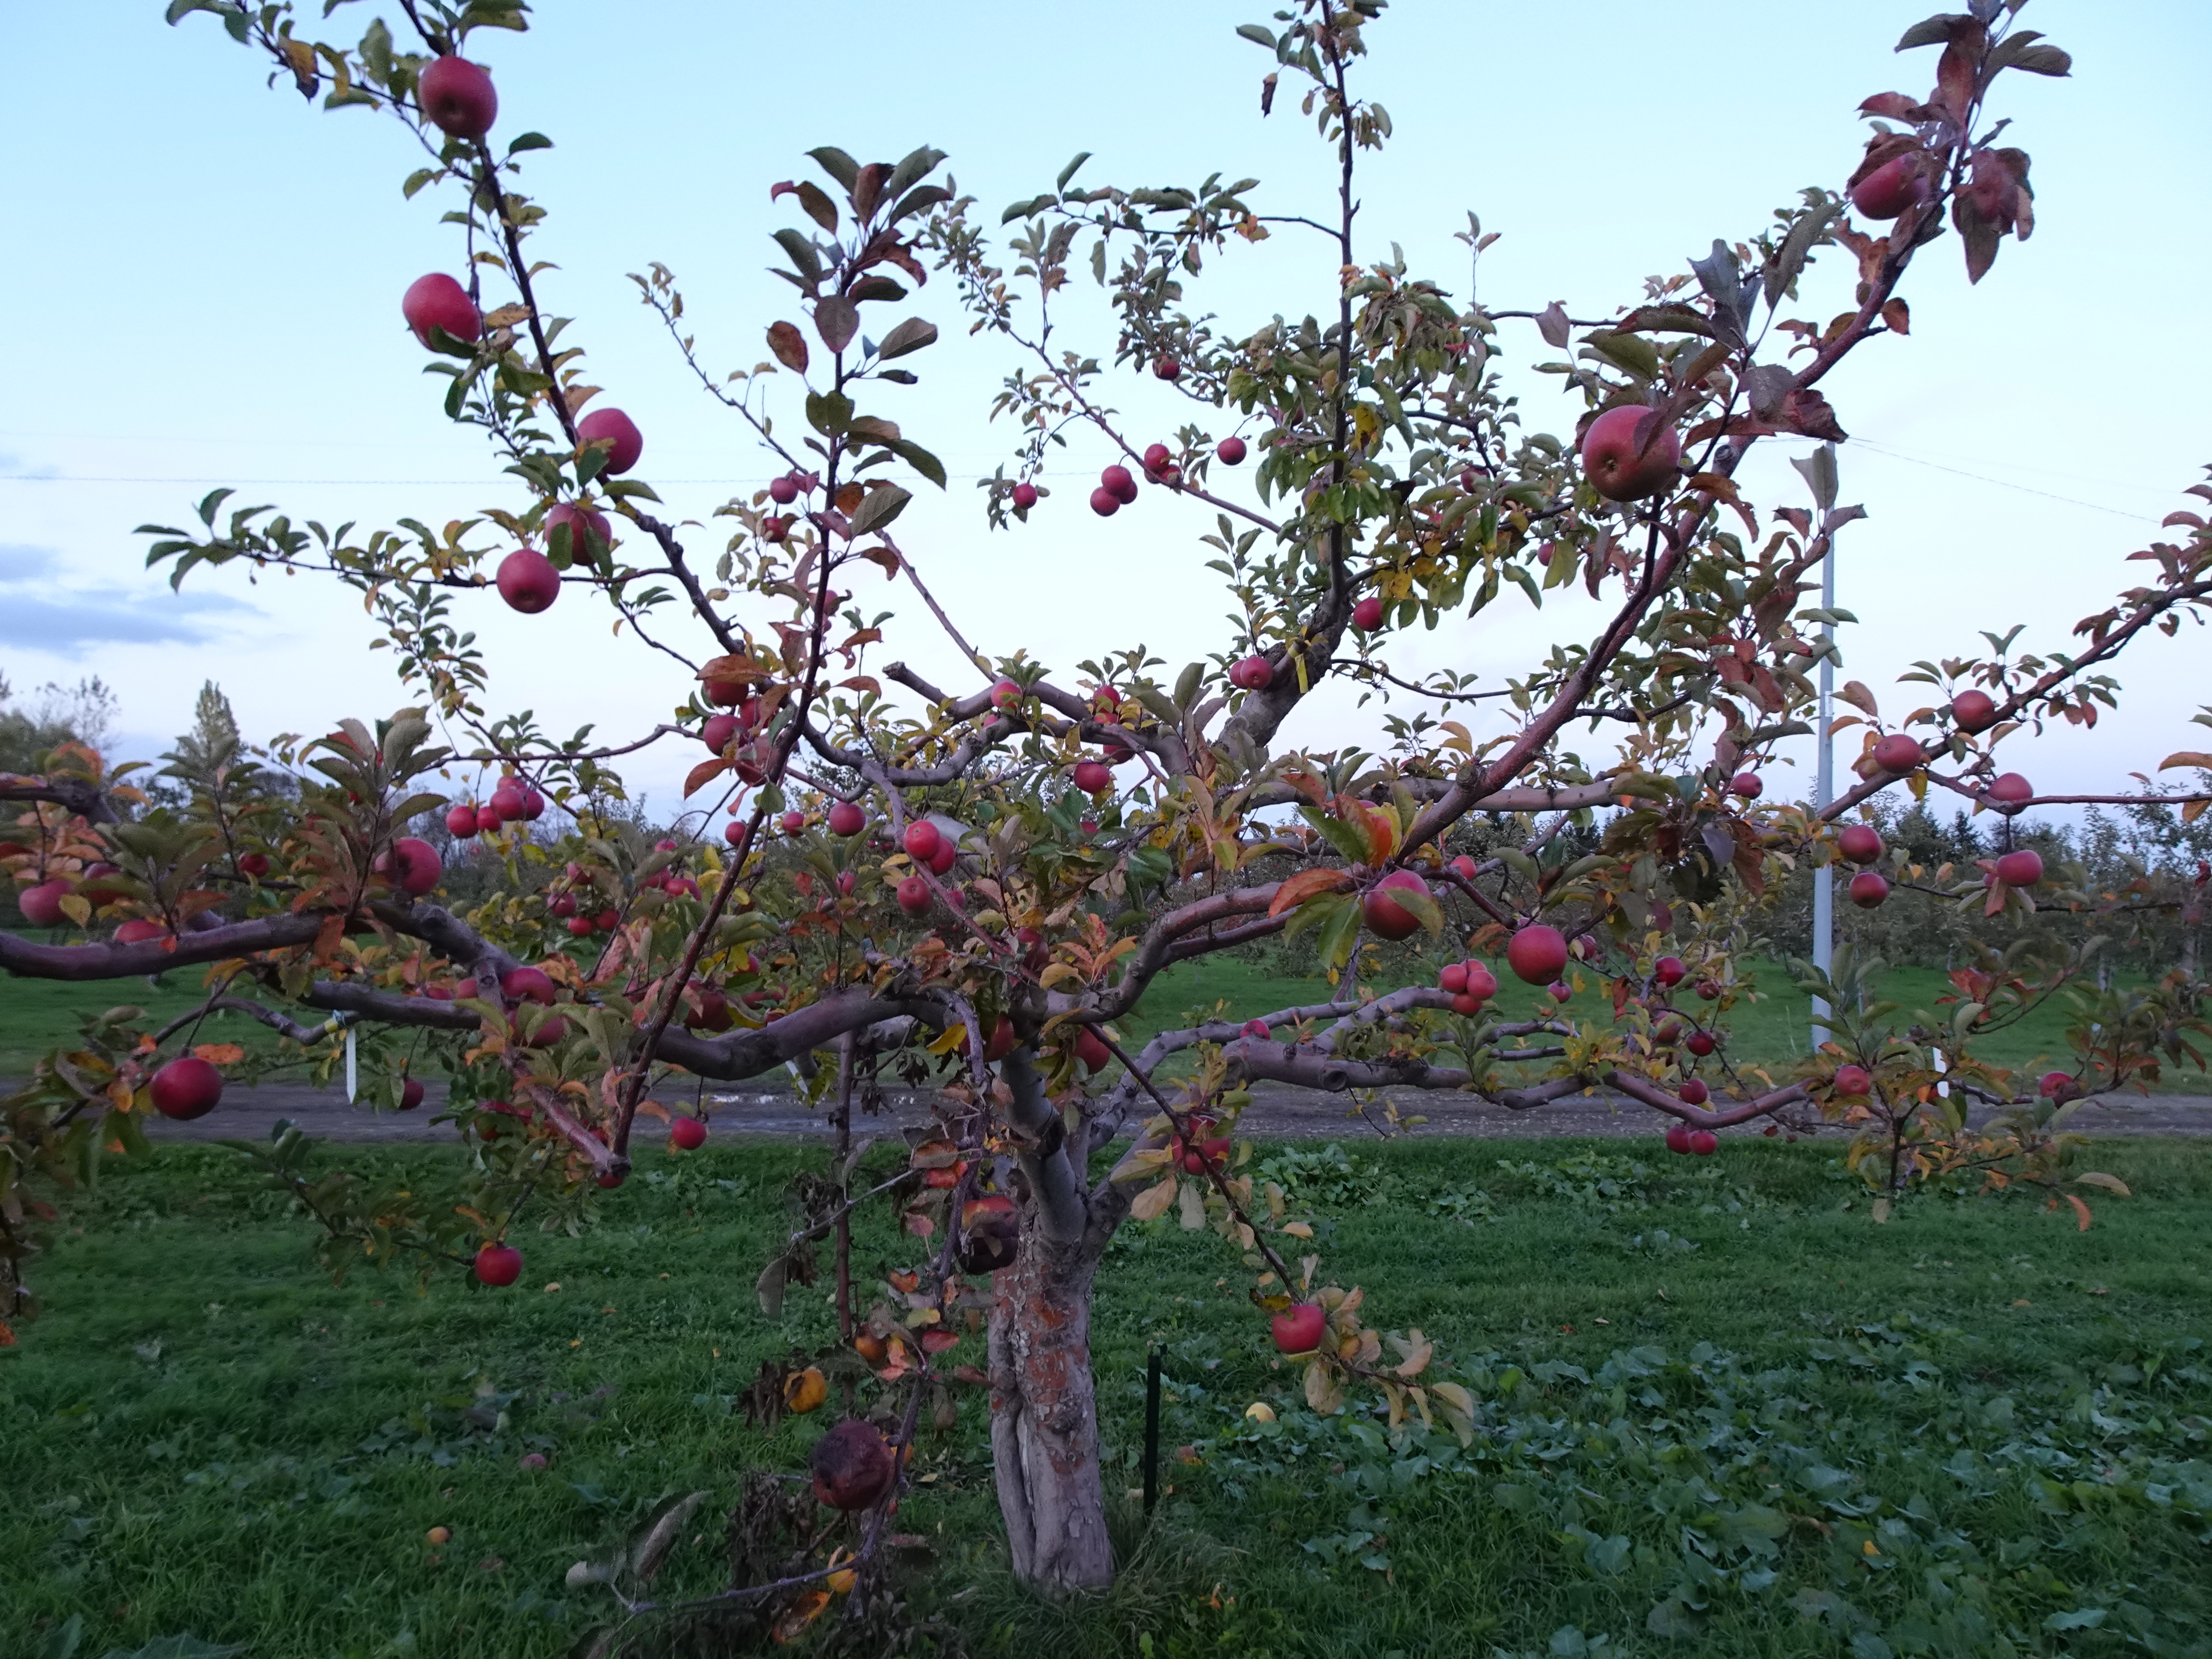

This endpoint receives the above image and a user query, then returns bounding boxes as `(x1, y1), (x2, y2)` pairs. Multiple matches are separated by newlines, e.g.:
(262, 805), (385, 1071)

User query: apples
(1240, 1018), (1274, 1047)
(817, 616), (832, 632)
(1218, 436), (1248, 466)
(906, 932), (948, 972)
(1679, 1078), (1711, 1105)
(373, 836), (444, 900)
(1876, 734), (1922, 778)
(515, 1105), (553, 1144)
(734, 742), (784, 787)
(1651, 1009), (1689, 1047)
(898, 875), (934, 911)
(1996, 848), (2045, 889)
(1117, 478), (1141, 508)
(1607, 863), (1640, 891)
(1695, 974), (1723, 1000)
(1590, 1041), (1617, 1065)
(235, 846), (273, 881)
(727, 950), (765, 988)
(669, 1116), (709, 1152)
(629, 1002), (667, 1037)
(1838, 822), (1883, 867)
(499, 771), (528, 799)
(445, 804), (483, 838)
(401, 272), (483, 355)
(18, 876), (84, 927)
(1752, 578), (1800, 617)
(80, 862), (138, 913)
(828, 1551), (862, 1591)
(956, 1007), (1017, 1065)
(642, 973), (694, 1027)
(2039, 1071), (2077, 1104)
(859, 833), (876, 849)
(1103, 735), (1135, 765)
(883, 1435), (915, 1468)
(1450, 991), (1483, 1017)
(1348, 813), (1398, 869)
(990, 681), (1025, 711)
(110, 917), (176, 968)
(539, 954), (582, 993)
(508, 1011), (565, 1051)
(418, 55), (499, 139)
(1457, 957), (1490, 983)
(1426, 504), (1466, 537)
(1360, 867), (1433, 943)
(567, 857), (599, 885)
(924, 835), (957, 877)
(1145, 466), (1165, 485)
(1072, 819), (1108, 852)
(781, 811), (812, 839)
(1145, 442), (1171, 473)
(1492, 527), (1511, 550)
(855, 1320), (882, 1357)
(594, 908), (624, 933)
(1537, 542), (1568, 570)
(1612, 998), (1647, 1030)
(1986, 773), (2035, 817)
(672, 974), (718, 1030)
(944, 886), (969, 920)
(1101, 465), (1133, 496)
(300, 957), (347, 994)
(1270, 437), (1304, 463)
(1686, 1131), (1719, 1156)
(665, 877), (698, 905)
(1438, 963), (1468, 995)
(543, 500), (613, 567)
(761, 983), (788, 1012)
(828, 800), (867, 839)
(925, 1157), (974, 1189)
(733, 981), (772, 1014)
(1169, 1115), (1233, 1177)
(1659, 363), (1696, 394)
(779, 619), (804, 645)
(882, 1493), (903, 1520)
(573, 408), (644, 476)
(1040, 1076), (1084, 1117)
(769, 475), (800, 506)
(409, 977), (457, 1012)
(1687, 1028), (1718, 1057)
(811, 590), (838, 615)
(1951, 181), (2019, 240)
(1730, 772), (1765, 802)
(476, 1241), (522, 1287)
(1278, 399), (1307, 428)
(703, 664), (752, 707)
(548, 886), (579, 919)
(3, 835), (42, 877)
(595, 1157), (628, 1190)
(1302, 479), (1328, 499)
(1547, 977), (1572, 1006)
(1849, 133), (1940, 225)
(1466, 971), (1499, 1001)
(1414, 556), (1443, 586)
(980, 711), (1010, 743)
(492, 787), (544, 822)
(653, 837), (681, 865)
(1764, 1120), (1780, 1139)
(703, 716), (748, 761)
(639, 864), (670, 892)
(0, 770), (21, 800)
(1344, 799), (1384, 834)
(1151, 352), (1183, 381)
(783, 1364), (829, 1415)
(889, 1268), (923, 1298)
(1580, 401), (1685, 506)
(1593, 951), (1609, 971)
(1444, 326), (1471, 354)
(1569, 932), (1599, 961)
(904, 888), (942, 921)
(1241, 656), (1274, 691)
(1059, 1022), (1112, 1074)
(760, 515), (790, 544)
(1011, 482), (1039, 509)
(740, 694), (781, 731)
(880, 839), (896, 854)
(1509, 926), (1566, 986)
(495, 548), (562, 614)
(1460, 462), (1494, 500)
(149, 1055), (224, 1122)
(1404, 307), (1425, 326)
(1651, 955), (1687, 988)
(566, 909), (595, 940)
(478, 801), (507, 837)
(582, 1130), (617, 1163)
(1833, 1062), (1873, 1101)
(1091, 684), (1125, 715)
(339, 777), (367, 804)
(1949, 688), (1997, 737)
(1694, 363), (1726, 392)
(1589, 867), (1609, 890)
(550, 1105), (591, 1138)
(1445, 854), (1479, 886)
(1730, 660), (1755, 684)
(1747, 380), (1794, 426)
(1228, 662), (1257, 692)
(725, 819), (751, 847)
(1093, 713), (1121, 732)
(1306, 1286), (1348, 1325)
(836, 870), (867, 899)
(490, 834), (517, 858)
(1353, 594), (1390, 634)
(315, 875), (350, 908)
(387, 1078), (426, 1112)
(1336, 1334), (1373, 1367)
(1159, 463), (1186, 484)
(961, 1197), (1022, 1248)
(1785, 1133), (1800, 1145)
(1090, 485), (1121, 518)
(993, 939), (1042, 987)
(1272, 1301), (1327, 1355)
(300, 811), (336, 845)
(468, 842), (485, 859)
(1667, 1118), (1702, 1155)
(1073, 758), (1111, 794)
(1848, 872), (1889, 910)
(474, 1098), (520, 1145)
(1013, 920), (1043, 954)
(2046, 1198), (2060, 1213)
(1658, 652), (1687, 680)
(453, 977), (492, 1006)
(902, 818), (943, 862)
(500, 965), (557, 1015)
(761, 1004), (791, 1036)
